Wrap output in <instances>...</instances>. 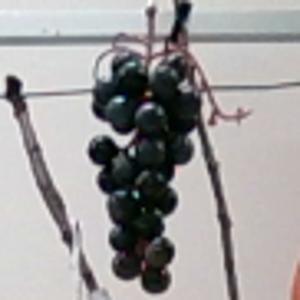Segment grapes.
<instances>
[{"label":"grapes","mask_w":300,"mask_h":300,"mask_svg":"<svg viewBox=\"0 0 300 300\" xmlns=\"http://www.w3.org/2000/svg\"><path fill=\"white\" fill-rule=\"evenodd\" d=\"M110 70L112 82L93 88L92 114L109 120L118 136L138 137L136 157L109 132L95 135L87 146L89 161L99 170L97 187L109 194L106 207L115 223L107 237L116 253L110 272L120 282L140 278L143 292L157 296L172 285L169 266L177 255L174 242L162 236V218L179 204L170 185L174 165H189L196 156L188 135L199 130L204 108L198 87L190 83L197 67L176 54L153 69L133 51L123 50L111 60Z\"/></svg>","instance_id":"01657485"}]
</instances>
